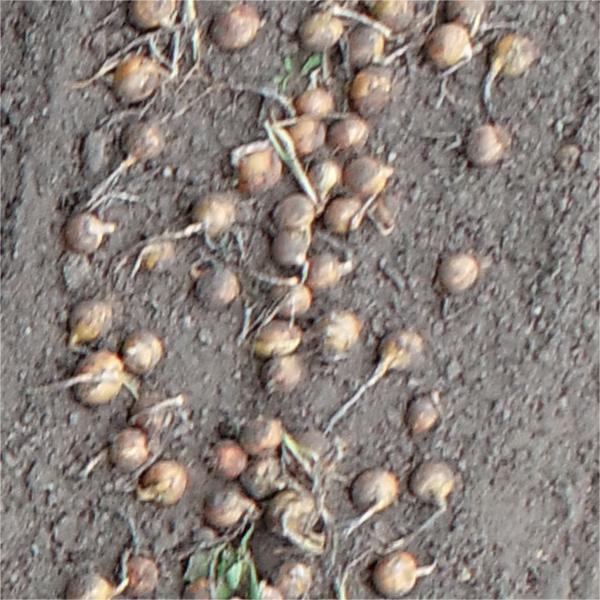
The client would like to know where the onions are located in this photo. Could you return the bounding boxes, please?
[191,190,238,235]
[138,461,185,503]
[297,12,341,50]
[74,349,124,402]
[209,441,246,479]
[66,570,109,600]
[265,353,304,389]
[63,213,108,252]
[410,459,458,505]
[344,26,383,67]
[282,285,309,315]
[113,427,150,467]
[251,584,284,600]
[376,3,412,41]
[194,263,240,305]
[137,238,178,272]
[125,0,172,31]
[124,554,157,593]
[319,310,367,356]
[296,88,339,118]
[124,122,164,162]
[244,456,283,496]
[423,24,471,70]
[303,253,347,293]
[489,33,538,80]
[267,224,310,262]
[312,160,341,193]
[351,468,399,512]
[341,155,382,195]
[115,53,165,102]
[238,415,282,455]
[273,192,314,232]
[466,122,509,166]
[371,550,415,594]
[255,320,300,358]
[69,297,114,343]
[235,144,280,192]
[290,119,323,153]
[349,63,397,115]
[207,4,259,49]
[404,395,441,433]
[436,250,480,293]
[270,492,316,535]
[328,115,368,152]
[121,328,163,371]
[275,564,313,596]
[203,486,252,528]
[325,195,362,231]
[185,576,231,600]
[377,326,427,379]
